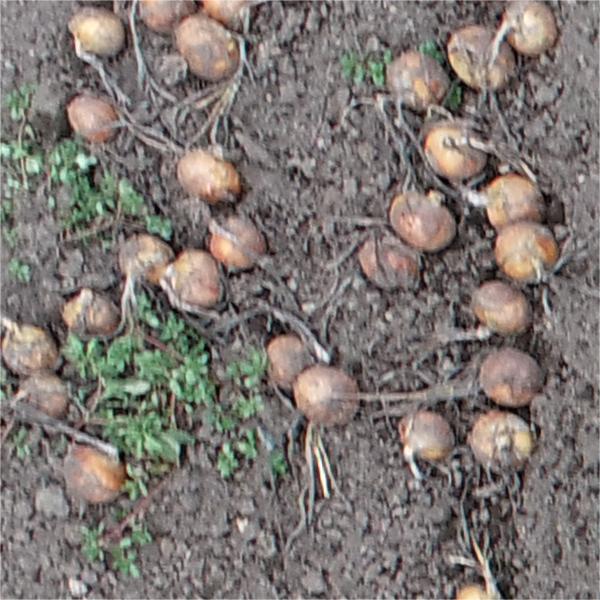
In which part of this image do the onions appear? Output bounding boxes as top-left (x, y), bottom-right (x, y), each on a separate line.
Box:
top-left (201, 0), bottom-right (246, 27)
top-left (447, 25), bottom-right (515, 88)
top-left (66, 92), bottom-right (120, 145)
top-left (508, 2), bottom-right (556, 55)
top-left (64, 293), bottom-right (120, 338)
top-left (477, 347), bottom-right (541, 405)
top-left (179, 149), bottom-right (240, 202)
top-left (471, 412), bottom-right (536, 467)
top-left (67, 576), bottom-right (86, 594)
top-left (388, 189), bottom-right (453, 251)
top-left (425, 123), bottom-right (484, 179)
top-left (116, 232), bottom-right (172, 283)
top-left (472, 279), bottom-right (529, 333)
top-left (454, 580), bottom-right (495, 599)
top-left (3, 322), bottom-right (56, 376)
top-left (485, 174), bottom-right (540, 225)
top-left (491, 220), bottom-right (557, 283)
top-left (21, 374), bottom-right (69, 424)
top-left (209, 214), bottom-right (265, 266)
top-left (361, 235), bottom-right (420, 289)
top-left (72, 8), bottom-right (123, 57)
top-left (58, 443), bottom-right (125, 507)
top-left (288, 366), bottom-right (358, 429)
top-left (389, 51), bottom-right (448, 108)
top-left (174, 19), bottom-right (235, 79)
top-left (139, 0), bottom-right (192, 36)
top-left (398, 407), bottom-right (455, 471)
top-left (267, 333), bottom-right (317, 387)
top-left (166, 251), bottom-right (222, 309)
